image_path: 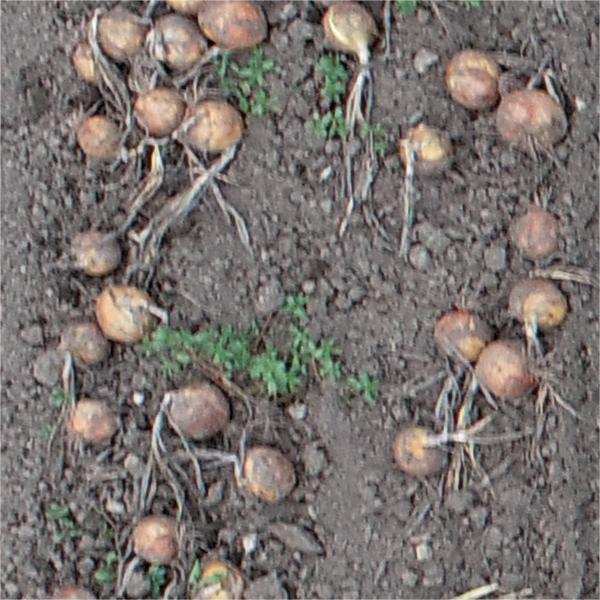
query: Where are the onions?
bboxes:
[197,0,264,50]
[98,7,148,56]
[191,557,243,597]
[496,90,564,150]
[180,99,242,152]
[69,397,117,444]
[163,379,228,440]
[403,125,450,168]
[73,228,119,274]
[134,88,183,134]
[442,51,502,111]
[68,45,98,81]
[51,582,91,599]
[72,115,123,163]
[237,448,291,501]
[94,283,162,345]
[149,14,203,69]
[476,340,537,398]
[507,205,559,259]
[322,5,375,53]
[391,425,444,478]
[509,278,566,330]
[436,307,491,364]
[131,512,178,566]
[63,322,108,364]
[166,0,208,16]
